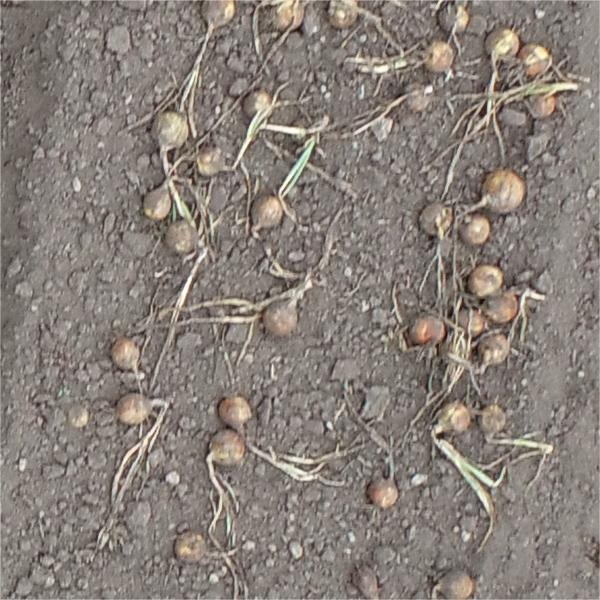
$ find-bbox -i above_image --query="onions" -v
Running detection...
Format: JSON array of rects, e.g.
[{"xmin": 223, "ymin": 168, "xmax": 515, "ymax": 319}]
[
  {"xmin": 243, "ymin": 88, "xmax": 267, "ymax": 118},
  {"xmin": 422, "ymin": 39, "xmax": 454, "ymax": 70},
  {"xmin": 436, "ymin": 400, "xmax": 469, "ymax": 431},
  {"xmin": 440, "ymin": 1, "xmax": 473, "ymax": 32},
  {"xmin": 434, "ymin": 567, "xmax": 474, "ymax": 599},
  {"xmin": 217, "ymin": 392, "xmax": 251, "ymax": 426},
  {"xmin": 479, "ymin": 167, "xmax": 524, "ymax": 210},
  {"xmin": 64, "ymin": 405, "xmax": 89, "ymax": 430},
  {"xmin": 478, "ymin": 405, "xmax": 506, "ymax": 435},
  {"xmin": 420, "ymin": 203, "xmax": 454, "ymax": 237},
  {"xmin": 461, "ymin": 214, "xmax": 489, "ymax": 243},
  {"xmin": 209, "ymin": 430, "xmax": 244, "ymax": 466},
  {"xmin": 140, "ymin": 188, "xmax": 172, "ymax": 220},
  {"xmin": 110, "ymin": 334, "xmax": 139, "ymax": 369},
  {"xmin": 482, "ymin": 289, "xmax": 515, "ymax": 323},
  {"xmin": 249, "ymin": 192, "xmax": 282, "ymax": 230},
  {"xmin": 366, "ymin": 476, "xmax": 397, "ymax": 506},
  {"xmin": 466, "ymin": 262, "xmax": 501, "ymax": 297},
  {"xmin": 273, "ymin": 0, "xmax": 300, "ymax": 29},
  {"xmin": 174, "ymin": 531, "xmax": 205, "ymax": 561},
  {"xmin": 406, "ymin": 316, "xmax": 443, "ymax": 347},
  {"xmin": 195, "ymin": 144, "xmax": 226, "ymax": 173},
  {"xmin": 519, "ymin": 43, "xmax": 548, "ymax": 73},
  {"xmin": 263, "ymin": 295, "xmax": 298, "ymax": 336},
  {"xmin": 326, "ymin": 0, "xmax": 356, "ymax": 29},
  {"xmin": 164, "ymin": 223, "xmax": 193, "ymax": 254},
  {"xmin": 115, "ymin": 394, "xmax": 147, "ymax": 425},
  {"xmin": 404, "ymin": 83, "xmax": 428, "ymax": 109},
  {"xmin": 456, "ymin": 298, "xmax": 485, "ymax": 331},
  {"xmin": 529, "ymin": 93, "xmax": 554, "ymax": 117},
  {"xmin": 151, "ymin": 110, "xmax": 189, "ymax": 148},
  {"xmin": 199, "ymin": 2, "xmax": 234, "ymax": 28},
  {"xmin": 487, "ymin": 28, "xmax": 519, "ymax": 60},
  {"xmin": 476, "ymin": 332, "xmax": 508, "ymax": 365}
]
